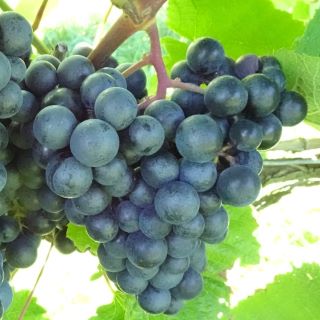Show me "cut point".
<instances>
[{
    "label": "cut point",
    "mask_w": 320,
    "mask_h": 320,
    "mask_svg": "<svg viewBox=\"0 0 320 320\" xmlns=\"http://www.w3.org/2000/svg\"><path fill=\"white\" fill-rule=\"evenodd\" d=\"M150 37V53L145 55L135 64L127 68L121 73L124 79L132 75L141 65H154L158 73V90L156 96H150L143 99L137 104L138 109H145L147 105L156 100H165L166 87L180 88L184 91L196 92L205 95V89L192 83H182L175 80H170L166 66L162 59V52L160 46L158 25L153 18L144 28L141 29Z\"/></svg>",
    "instance_id": "6a23745f"
}]
</instances>
